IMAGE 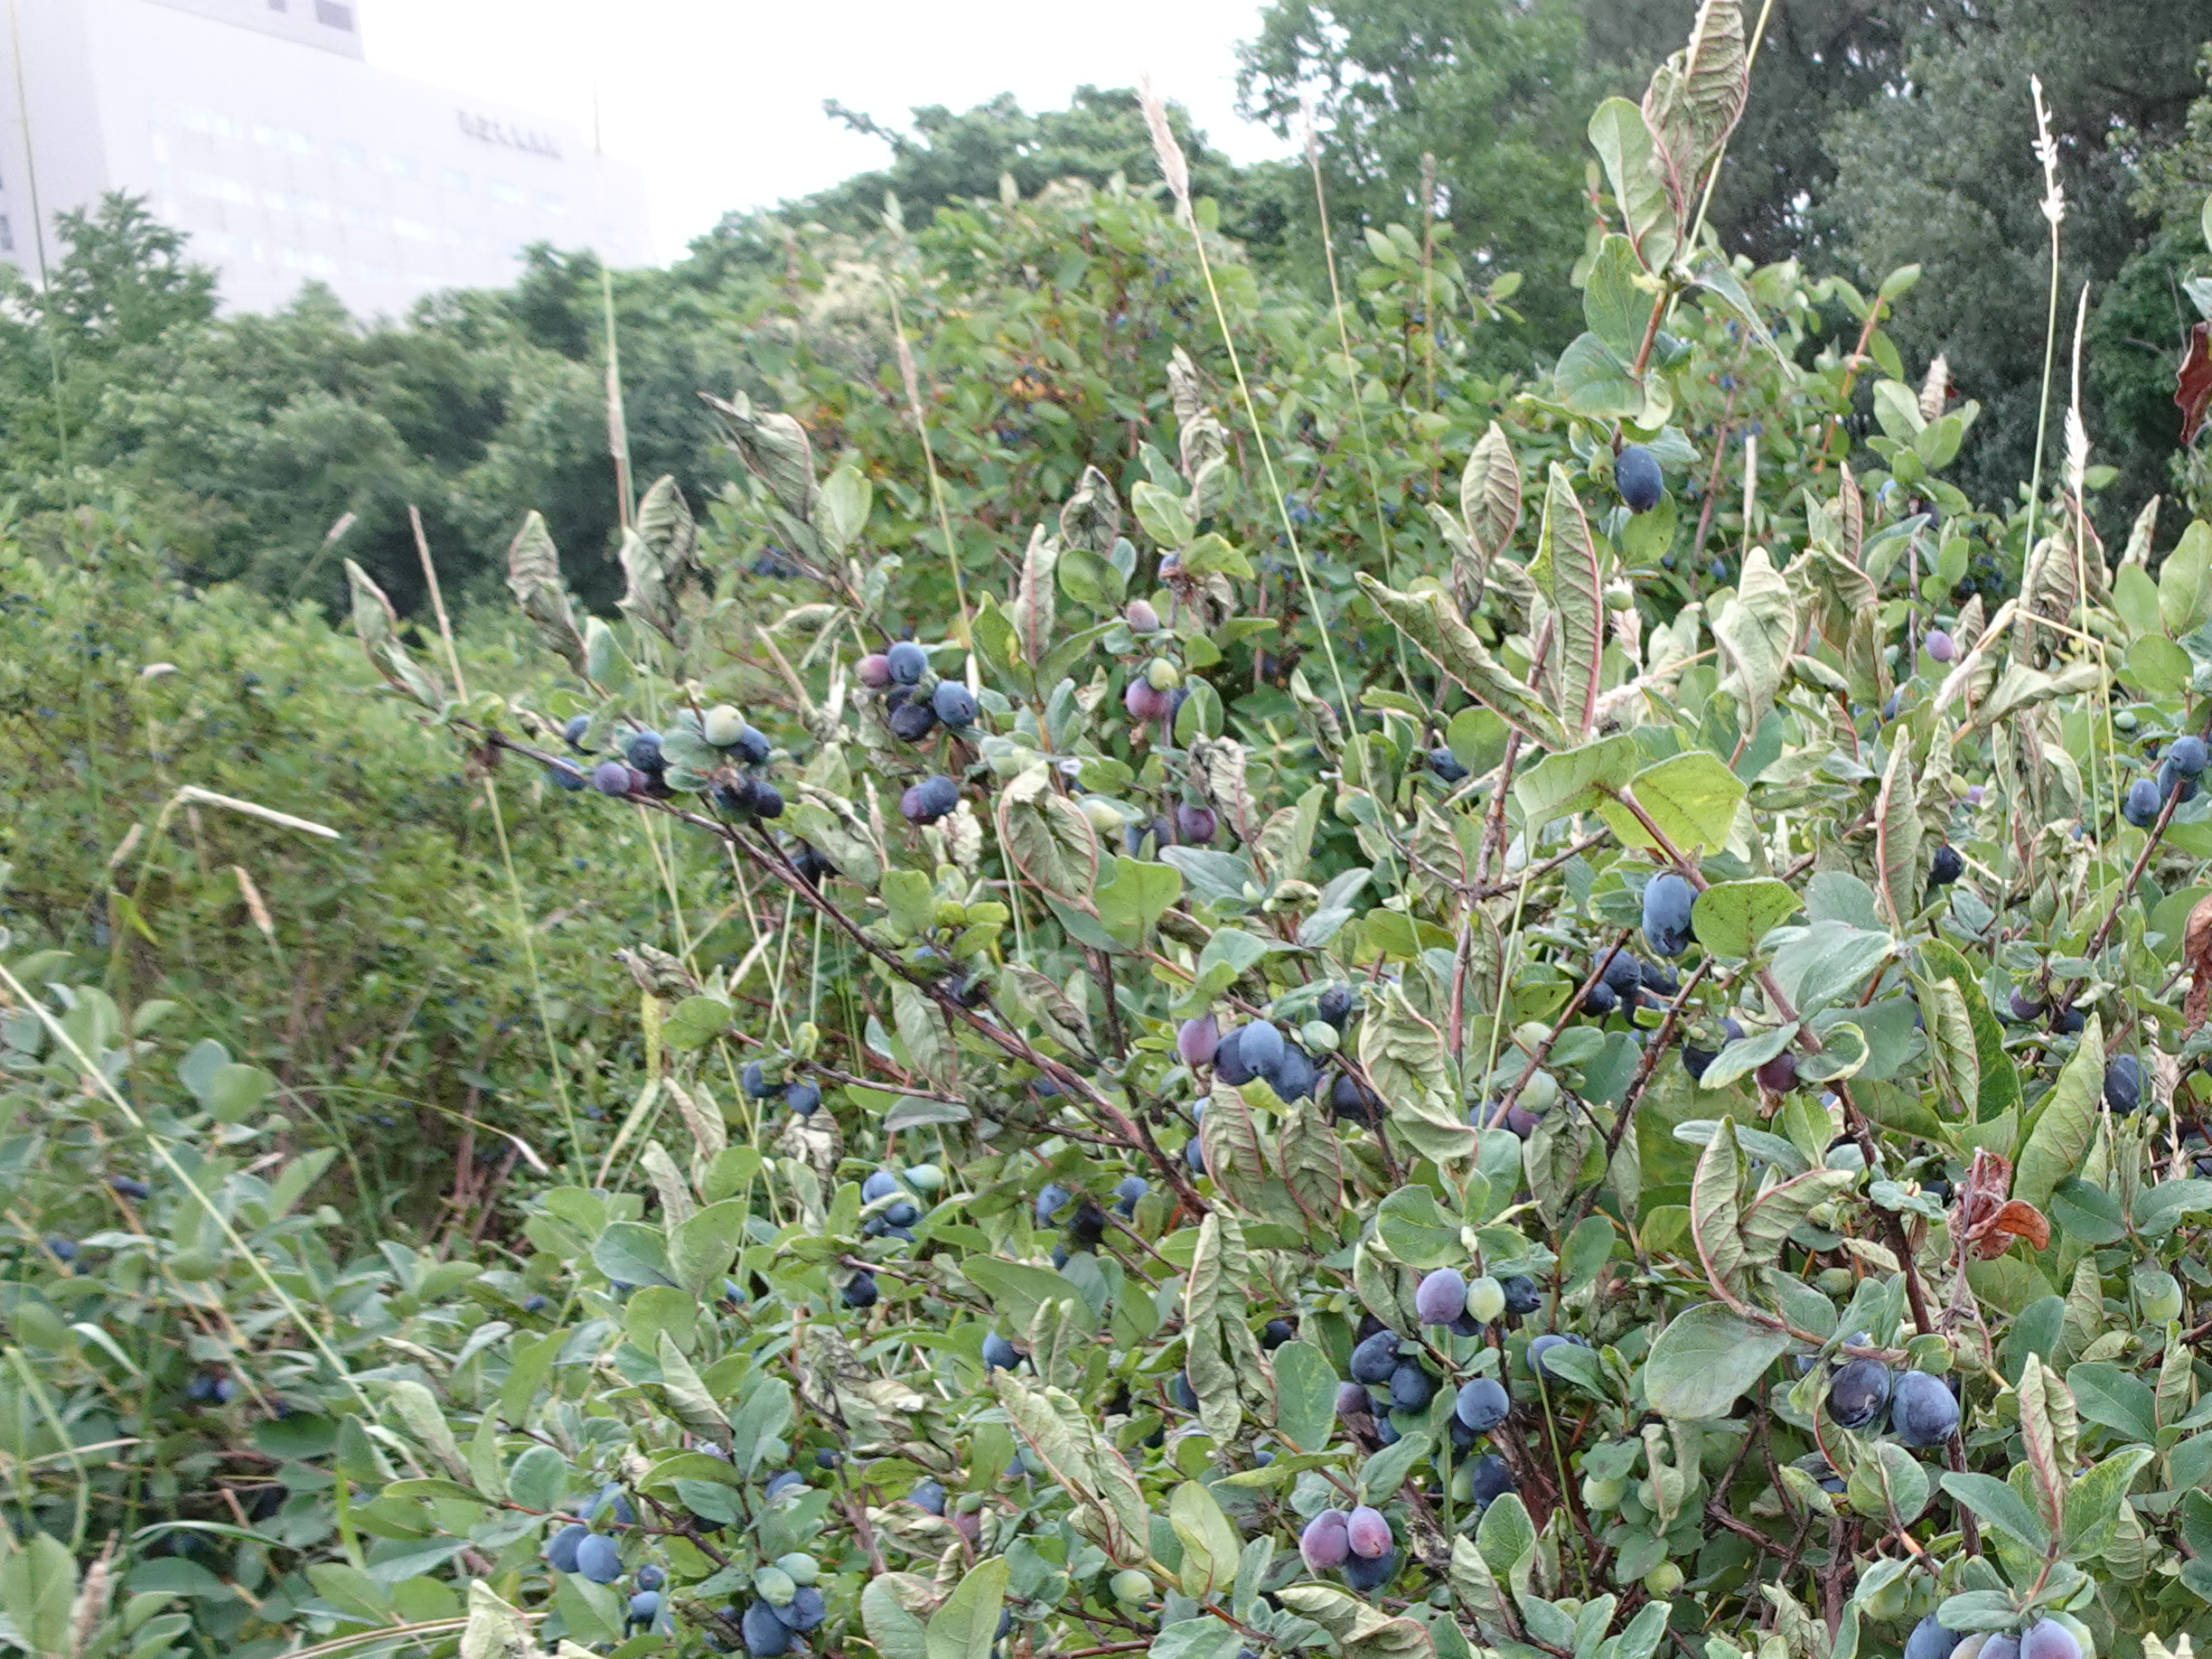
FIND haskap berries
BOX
[1448,1415,1475,1451]
[1927,847,1963,884]
[1528,1334,1568,1380]
[1137,1605,1159,1633]
[753,1567,795,1606]
[1431,1444,1468,1469]
[886,685,915,714]
[926,775,961,812]
[1186,1136,1208,1177]
[741,1058,788,1096]
[1388,1354,1438,1418]
[1966,784,1988,805]
[2167,735,2209,770]
[1070,1204,1103,1249]
[1345,1548,1397,1591]
[1507,1102,1542,1139]
[1918,500,1940,528]
[1047,1243,1070,1271]
[2143,744,2161,762]
[1643,871,1691,930]
[2063,1007,2082,1031]
[1428,747,1471,782]
[1447,1310,1488,1336]
[950,976,979,1008]
[1810,1202,1835,1227]
[1468,1101,1507,1131]
[1627,1030,1640,1044]
[1296,1526,1305,1536]
[765,1479,776,1500]
[1226,1014,1279,1088]
[663,1612,677,1633]
[1175,1370,1200,1412]
[1908,1557,1947,1617]
[1417,1268,1465,1324]
[1578,983,1617,1016]
[1823,1478,1847,1492]
[1318,984,1350,1023]
[2114,1055,2149,1092]
[2100,1066,2140,1116]
[812,841,842,877]
[1263,1038,1311,1097]
[625,1591,662,1624]
[1884,692,1906,721]
[2114,712,2135,728]
[981,1329,1025,1371]
[547,1524,590,1572]
[1685,883,1700,944]
[1844,1330,1867,1349]
[1673,1029,1684,1044]
[1976,1631,2023,1659]
[957,1490,983,1513]
[1681,1016,1744,1085]
[1080,801,1120,834]
[1621,989,1660,1031]
[1032,1076,1072,1099]
[1299,1021,1341,1053]
[712,773,757,809]
[1553,1599,1581,1619]
[612,1277,633,1292]
[855,652,895,687]
[1095,1057,1128,1091]
[1892,1369,1959,1448]
[1759,1056,1799,1091]
[1347,1505,1392,1559]
[1358,1313,1389,1345]
[1855,703,1879,730]
[792,854,820,885]
[903,1165,944,1189]
[1464,1277,1505,1324]
[815,1447,843,1470]
[1108,1569,1153,1606]
[744,1600,789,1657]
[637,1565,664,1592]
[2163,1118,2200,1153]
[2009,982,2046,1021]
[1452,1459,1481,1502]
[2020,1618,2076,1659]
[1194,1095,1211,1120]
[914,945,936,963]
[1582,1475,1628,1512]
[1923,631,1952,662]
[2158,758,2197,801]
[1302,1509,1351,1568]
[524,1295,543,1318]
[1515,1021,1552,1054]
[754,781,781,818]
[2073,824,2081,842]
[1112,1175,1152,1217]
[625,763,647,790]
[1941,1374,1960,1396]
[1827,1358,1893,1428]
[891,643,927,684]
[1923,1180,1949,1199]
[1861,1573,1911,1619]
[702,1443,729,1466]
[1256,1449,1276,1469]
[1261,1320,1290,1350]
[701,703,746,747]
[1036,1179,1083,1231]
[1640,957,1680,997]
[1075,777,1088,794]
[1351,1330,1403,1385]
[695,1514,727,1533]
[629,731,668,775]
[786,1632,803,1653]
[934,680,977,725]
[2194,1141,2212,1179]
[647,774,679,800]
[987,1650,1001,1659]
[598,1617,630,1651]
[1914,1007,1923,1029]
[1333,1074,1375,1119]
[774,1552,819,1585]
[556,755,584,792]
[838,1271,880,1307]
[722,1278,744,1308]
[1377,1415,1403,1446]
[2184,1124,2212,1152]
[1002,1453,1022,1487]
[1904,1613,1960,1659]
[864,1171,896,1202]
[1948,1631,1990,1659]
[1160,552,1180,572]
[1460,1225,1477,1253]
[1816,1268,1853,1295]
[1881,478,1893,502]
[1996,1013,2008,1027]
[889,706,934,741]
[1517,1069,1555,1113]
[1620,1501,1655,1525]
[1820,1090,1836,1110]
[726,723,768,762]
[1163,686,1190,723]
[562,717,596,756]
[902,1480,945,1514]
[594,762,630,796]
[1644,1560,1684,1602]
[772,1471,802,1497]
[1640,908,1690,956]
[1454,1371,1510,1433]
[956,1508,980,1540]
[884,1224,916,1245]
[578,1495,599,1522]
[1355,1096,1385,1132]
[881,1203,916,1227]
[1615,443,1663,512]
[1333,1379,1366,1415]
[1593,946,1641,996]
[2124,779,2164,827]
[578,1534,621,1583]
[1179,796,1216,841]
[1427,1480,1446,1510]
[1178,1003,1229,1075]
[1128,599,1158,633]
[993,1606,1010,1642]
[760,1156,775,1175]
[1148,655,1176,689]
[1471,1454,1510,1512]
[601,1482,636,1531]
[1561,1332,1588,1348]
[2046,1005,2069,1035]
[1366,1390,1390,1419]
[1242,880,1263,904]
[1500,1274,1540,1315]
[2075,1468,2087,1478]
[772,1586,827,1629]
[786,1076,821,1117]
[864,1217,884,1234]
[1125,673,1162,719]
[2139,1272,2184,1327]
[899,785,943,825]
[1906,983,1919,1003]
[703,1606,740,1654]
[1798,1353,1816,1375]
[1124,813,1173,862]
